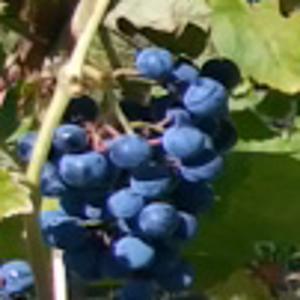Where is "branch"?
<instances>
[{"instance_id":"30e6481e","label":"branch","mask_w":300,"mask_h":300,"mask_svg":"<svg viewBox=\"0 0 300 300\" xmlns=\"http://www.w3.org/2000/svg\"><path fill=\"white\" fill-rule=\"evenodd\" d=\"M109 10L110 0H97L95 9L73 45L65 65L61 67L58 73V83L55 86L54 97L42 117L41 125L27 158L25 177L27 184L30 186H35L39 182L40 169L51 152L52 140L50 136L54 127L59 126L64 117V107L70 102L71 97H75L79 93L81 77L79 72L84 61L85 52Z\"/></svg>"}]
</instances>
